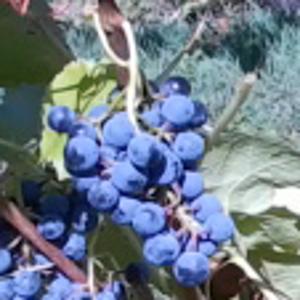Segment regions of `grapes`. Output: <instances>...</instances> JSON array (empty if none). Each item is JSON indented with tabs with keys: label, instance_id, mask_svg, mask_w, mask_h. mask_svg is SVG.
<instances>
[{
	"label": "grapes",
	"instance_id": "01657485",
	"mask_svg": "<svg viewBox=\"0 0 300 300\" xmlns=\"http://www.w3.org/2000/svg\"><path fill=\"white\" fill-rule=\"evenodd\" d=\"M161 100L143 117L128 120L124 110L111 115L100 102L83 119L71 107L54 105L45 124L65 134L63 164L74 178L71 196L48 194L33 179L21 183L26 204L39 203L33 230L58 241L73 262L87 255V234L99 214L145 238L141 257L149 265H172V276L188 289L200 288L211 269L210 257L235 234L234 218L219 196L204 191L199 173L208 150L199 131L208 123L206 106L192 96L186 77L172 75L159 87ZM143 262H130L123 280L142 287L150 279Z\"/></svg>",
	"mask_w": 300,
	"mask_h": 300
},
{
	"label": "grapes",
	"instance_id": "0513c4c2",
	"mask_svg": "<svg viewBox=\"0 0 300 300\" xmlns=\"http://www.w3.org/2000/svg\"><path fill=\"white\" fill-rule=\"evenodd\" d=\"M50 262V258L41 250H35L31 254L30 263L34 267L46 266Z\"/></svg>",
	"mask_w": 300,
	"mask_h": 300
},
{
	"label": "grapes",
	"instance_id": "b958b902",
	"mask_svg": "<svg viewBox=\"0 0 300 300\" xmlns=\"http://www.w3.org/2000/svg\"><path fill=\"white\" fill-rule=\"evenodd\" d=\"M19 262L17 249L0 245V300H122L125 295L120 280H110L92 293L63 272L54 273L43 287V276L33 267L10 275Z\"/></svg>",
	"mask_w": 300,
	"mask_h": 300
}]
</instances>
